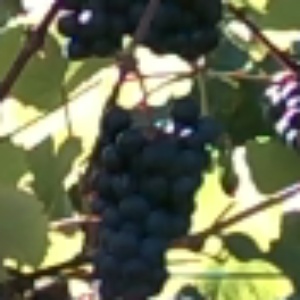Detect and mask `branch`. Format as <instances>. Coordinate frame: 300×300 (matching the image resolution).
<instances>
[{
  "label": "branch",
  "mask_w": 300,
  "mask_h": 300,
  "mask_svg": "<svg viewBox=\"0 0 300 300\" xmlns=\"http://www.w3.org/2000/svg\"><path fill=\"white\" fill-rule=\"evenodd\" d=\"M163 5L164 0H150L136 22V28L132 31L134 38L128 44L126 51H116L114 53V56L118 59V73L107 102L109 109H112L115 105L122 80L127 71L137 65V59L133 56L136 45L145 46L148 43V38L157 24L158 13Z\"/></svg>",
  "instance_id": "obj_1"
},
{
  "label": "branch",
  "mask_w": 300,
  "mask_h": 300,
  "mask_svg": "<svg viewBox=\"0 0 300 300\" xmlns=\"http://www.w3.org/2000/svg\"><path fill=\"white\" fill-rule=\"evenodd\" d=\"M300 191V184H295L291 188L287 189L285 192L281 193L278 196H274L270 199L264 200L257 204H254L243 211L237 212L231 215L227 220H224L207 231L203 232L201 235L193 234L188 236H181L176 237L173 240L168 242V246L170 248H193L200 244H202L206 239L213 236L215 233L219 232L220 230L229 227L230 225L236 224L238 220L246 217H250L254 214H257L263 210L269 209L270 207H274L280 204L285 199L289 198L291 195Z\"/></svg>",
  "instance_id": "obj_2"
},
{
  "label": "branch",
  "mask_w": 300,
  "mask_h": 300,
  "mask_svg": "<svg viewBox=\"0 0 300 300\" xmlns=\"http://www.w3.org/2000/svg\"><path fill=\"white\" fill-rule=\"evenodd\" d=\"M61 9L58 2H55L48 12H46L40 21L37 23L35 29L26 37L23 48L14 59L6 76L0 81V103L5 100L8 90L11 84L20 72L24 62L31 57L35 51H37L45 41V34L47 32V26L52 18L57 16V13Z\"/></svg>",
  "instance_id": "obj_3"
},
{
  "label": "branch",
  "mask_w": 300,
  "mask_h": 300,
  "mask_svg": "<svg viewBox=\"0 0 300 300\" xmlns=\"http://www.w3.org/2000/svg\"><path fill=\"white\" fill-rule=\"evenodd\" d=\"M94 253L95 250L90 248L82 254L76 255L73 259L47 268L33 270L19 276L14 281L0 288V300H5L6 298L12 297L24 286L31 285L39 278H46L55 274L66 272L82 263L91 262L93 260Z\"/></svg>",
  "instance_id": "obj_4"
},
{
  "label": "branch",
  "mask_w": 300,
  "mask_h": 300,
  "mask_svg": "<svg viewBox=\"0 0 300 300\" xmlns=\"http://www.w3.org/2000/svg\"><path fill=\"white\" fill-rule=\"evenodd\" d=\"M226 8L232 12L241 22L274 54L282 64L291 68L293 63L260 31L245 14L239 11L232 3H228Z\"/></svg>",
  "instance_id": "obj_5"
}]
</instances>
